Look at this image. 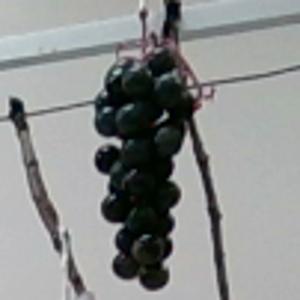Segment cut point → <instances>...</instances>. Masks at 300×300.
<instances>
[{
  "mask_svg": "<svg viewBox=\"0 0 300 300\" xmlns=\"http://www.w3.org/2000/svg\"><path fill=\"white\" fill-rule=\"evenodd\" d=\"M139 10L136 11L135 17L141 23V34H142V53L141 61L145 60V54L148 50L147 46V29L148 23L151 19V8L148 6V0H137Z\"/></svg>",
  "mask_w": 300,
  "mask_h": 300,
  "instance_id": "1",
  "label": "cut point"
}]
</instances>
